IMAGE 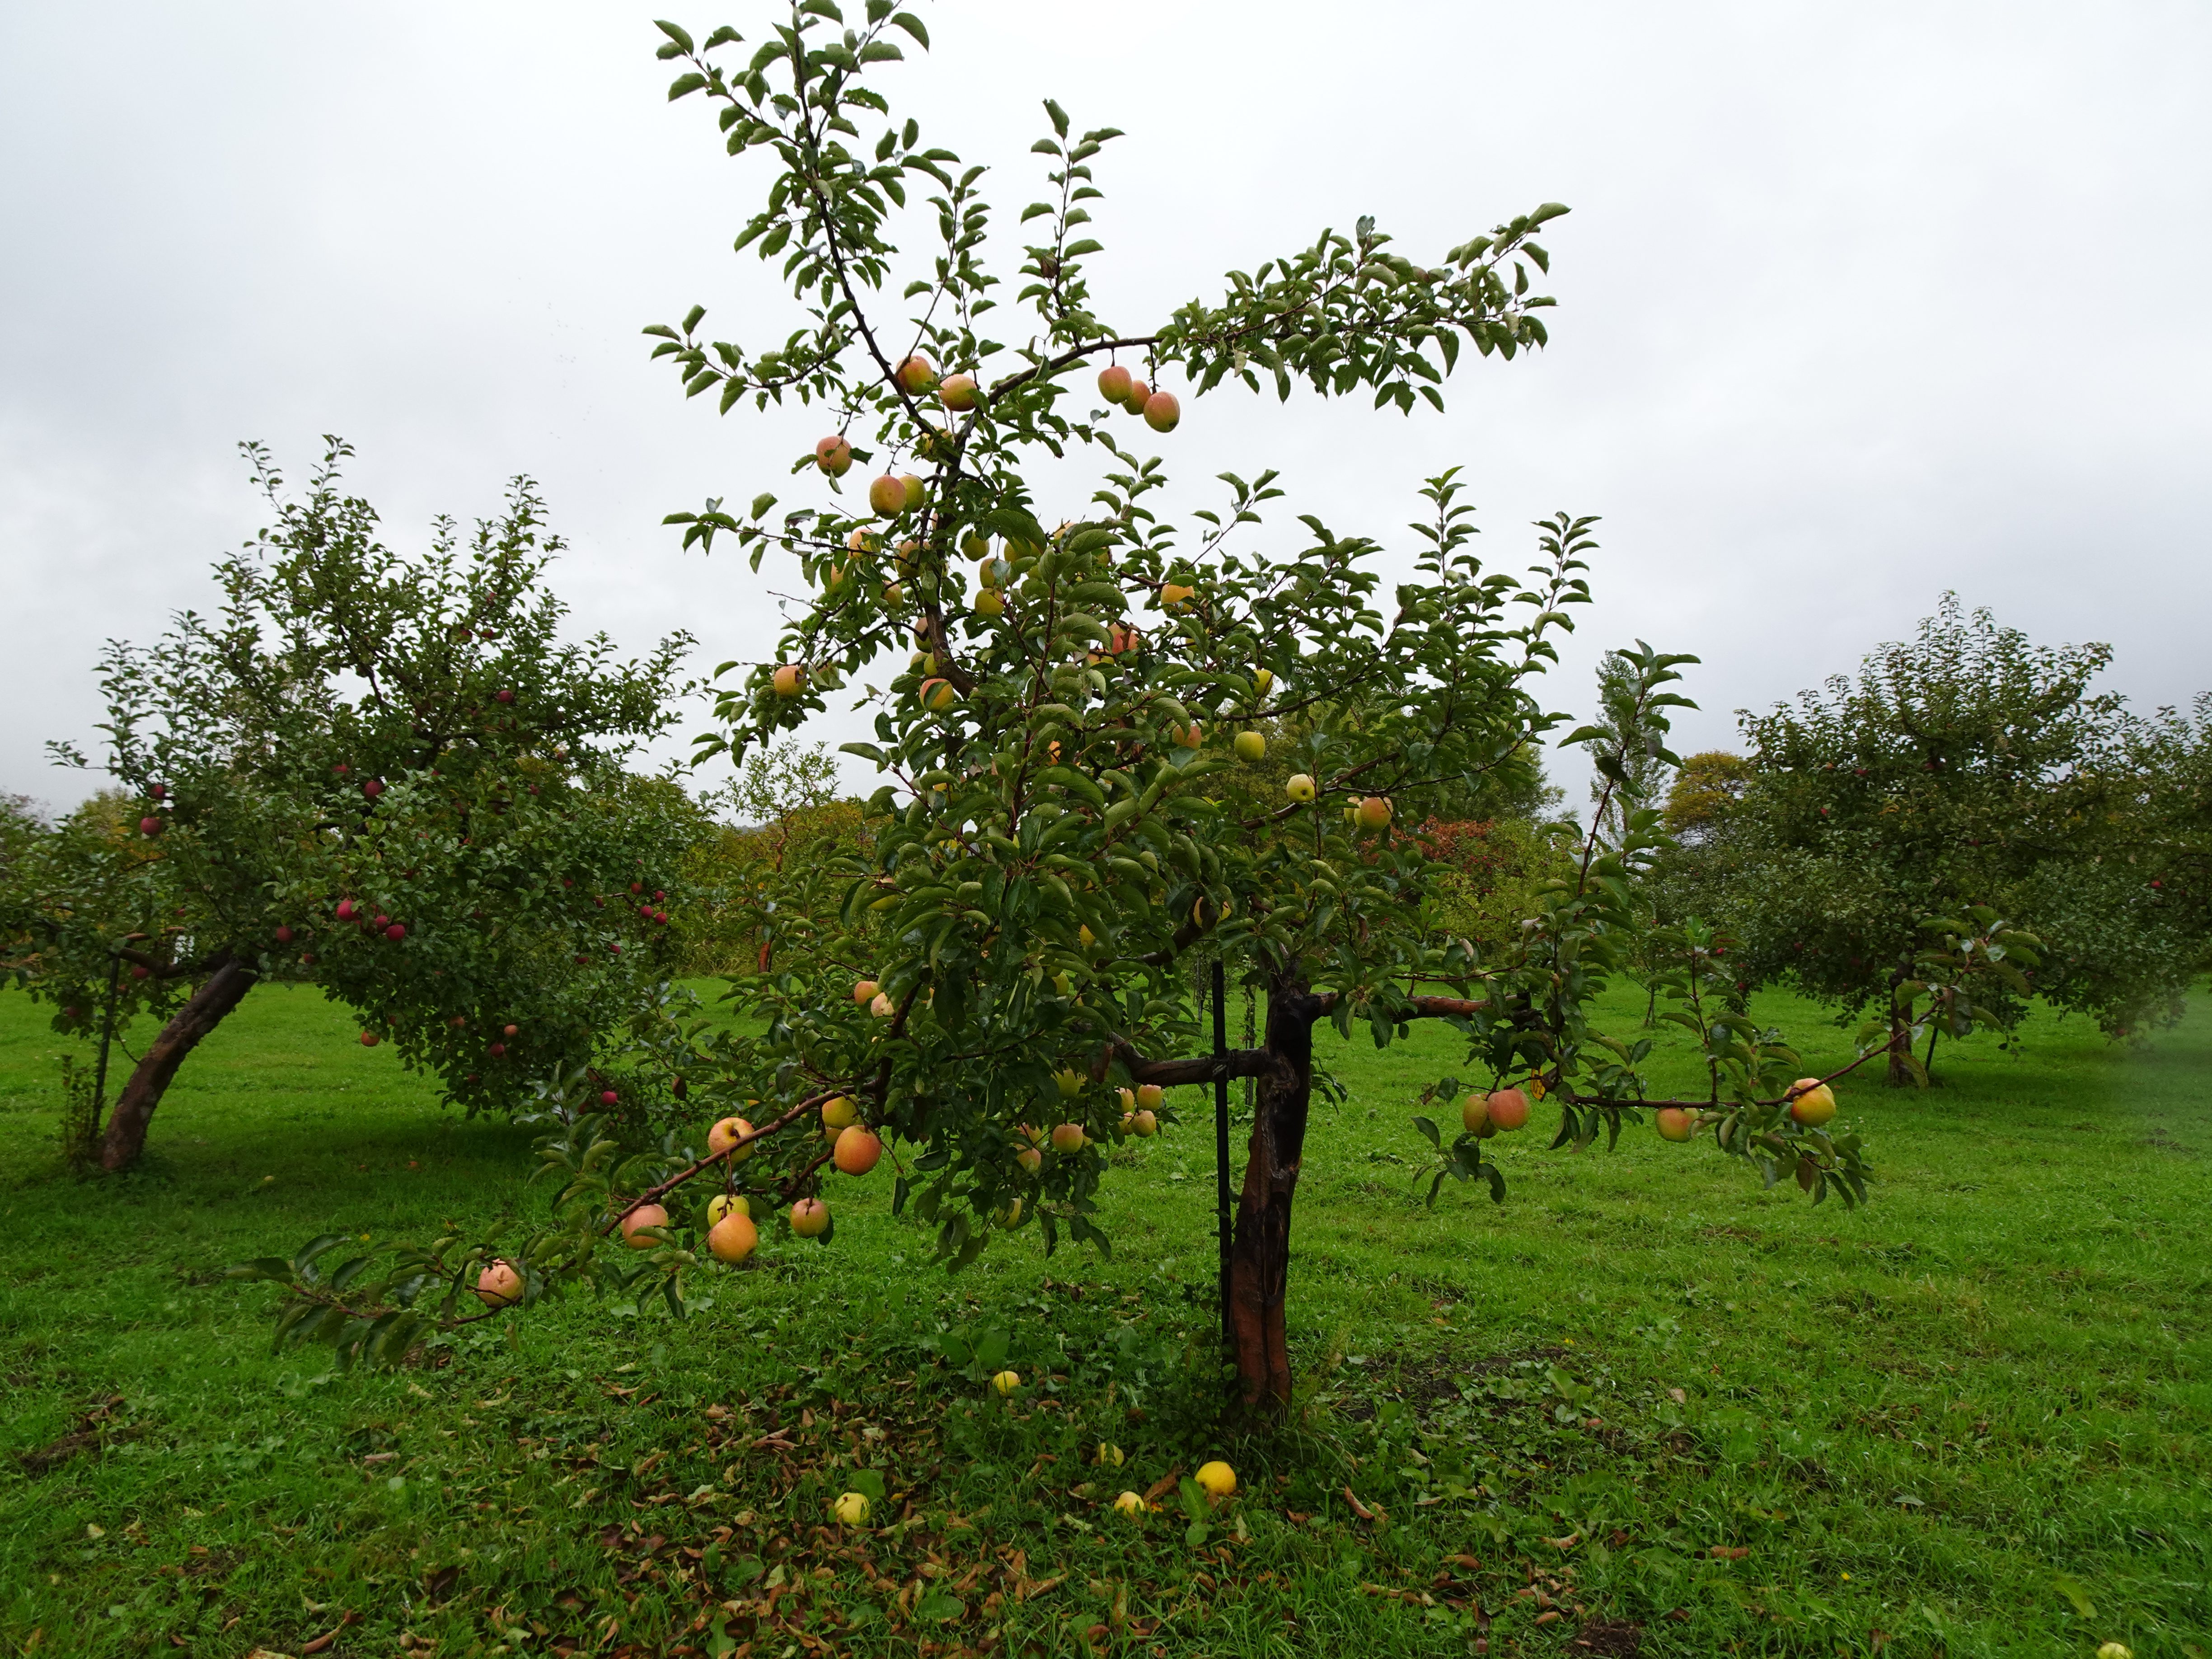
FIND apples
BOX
[1249,669,1273,697]
[1144,392,1181,433]
[1004,536,1040,563]
[1343,796,1368,824]
[924,652,948,675]
[621,1203,669,1251]
[1082,648,1115,666]
[1783,1077,1836,1128]
[914,617,933,653]
[1487,1087,1531,1132]
[477,1257,523,1309]
[854,981,882,1006]
[975,588,1005,620]
[1194,896,1232,930]
[869,475,906,520]
[896,355,934,396]
[1050,1067,1082,1098]
[826,1114,864,1149]
[708,1117,755,1165]
[1014,1145,1041,1175]
[870,992,895,1019]
[898,477,927,512]
[922,426,954,461]
[1185,637,1200,653]
[894,539,931,578]
[790,1197,829,1238]
[1361,797,1393,832]
[1655,1107,1699,1143]
[962,531,990,562]
[834,1125,882,1176]
[1235,731,1265,763]
[1130,1110,1156,1138]
[995,1195,1021,1228]
[1014,1124,1042,1146]
[919,678,955,711]
[1117,1112,1135,1136]
[882,579,903,609]
[1052,1123,1083,1154]
[1098,366,1133,404]
[1138,1085,1164,1115]
[1161,583,1195,616]
[980,558,1009,590]
[938,374,978,411]
[1052,972,1070,996]
[1463,1092,1499,1139]
[910,651,930,667]
[1107,623,1130,638]
[848,530,876,559]
[709,1213,758,1264]
[1287,774,1318,802]
[822,1090,859,1130]
[1111,1088,1135,1113]
[817,436,852,477]
[1079,923,1096,952]
[1122,380,1149,416]
[1172,724,1202,749]
[1112,631,1140,654]
[707,1194,750,1230]
[775,664,805,700]
[1353,801,1365,828]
